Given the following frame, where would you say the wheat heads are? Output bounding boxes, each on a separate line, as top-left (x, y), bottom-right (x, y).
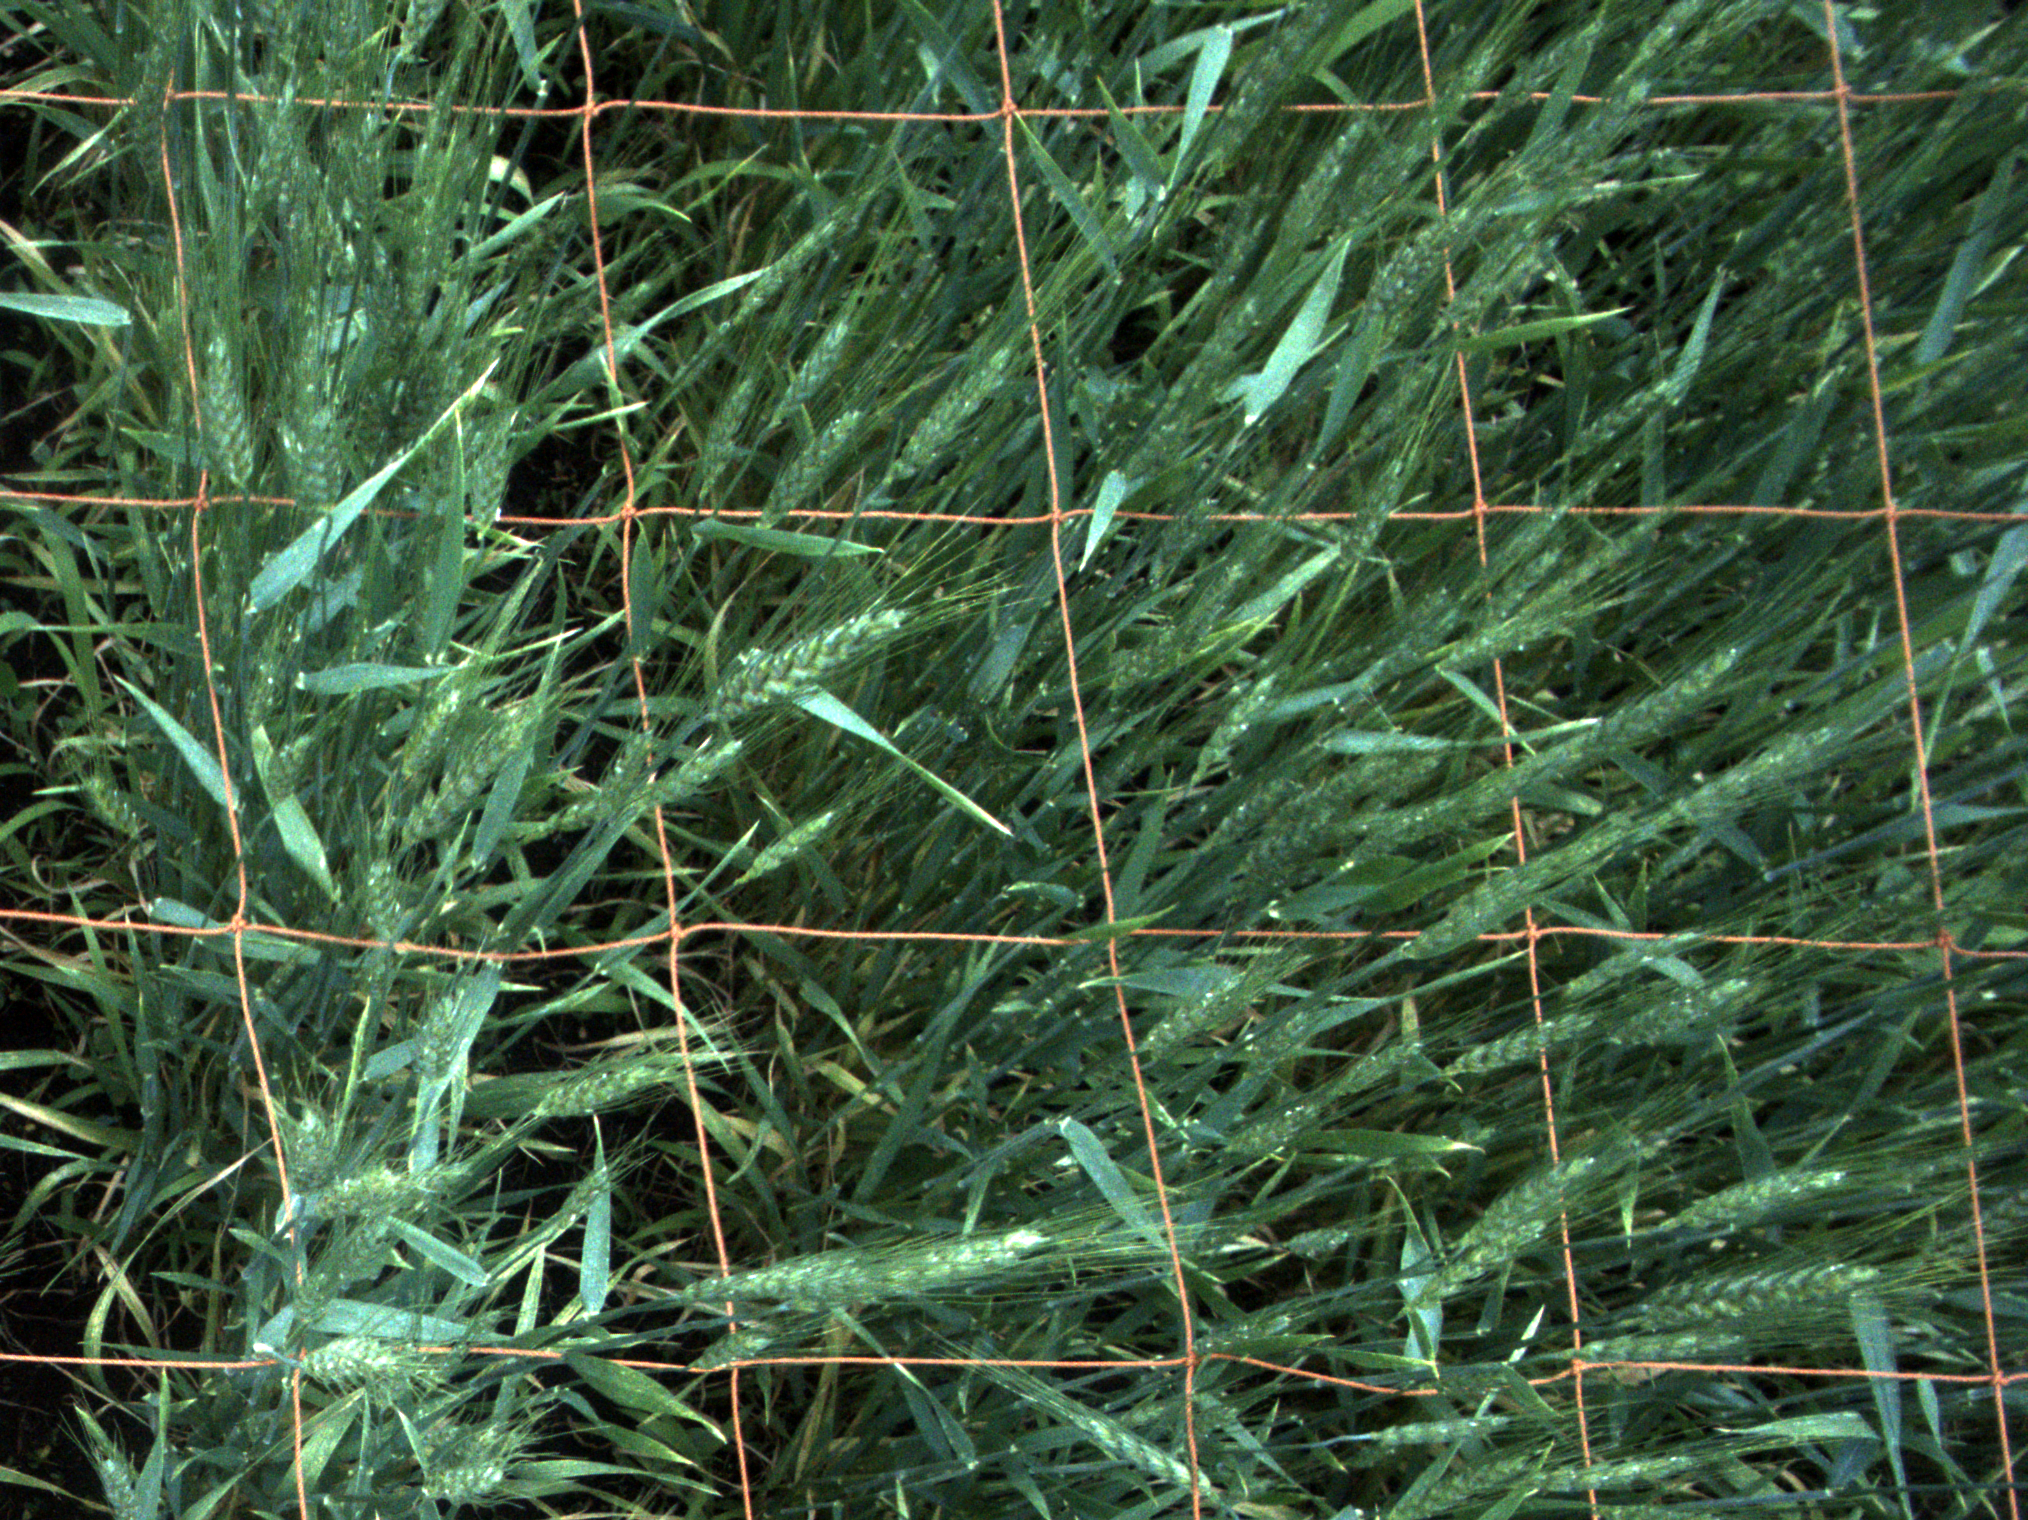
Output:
top-left (291, 1330), bottom-right (397, 1386)
top-left (203, 335), bottom-right (254, 481)
top-left (1906, 334), bottom-right (2028, 432)
top-left (1360, 363), bottom-right (1426, 438)
top-left (544, 280), bottom-right (604, 329)
top-left (1471, 236), bottom-right (1559, 316)
top-left (1429, 39), bottom-right (1495, 122)
top-left (1192, 672), bottom-right (1274, 778)
top-left (1243, 1004), bottom-right (1316, 1072)
top-left (1331, 141), bottom-right (1421, 235)
top-left (1541, 1454), bottom-right (1693, 1494)
top-left (1164, 291), bottom-right (1254, 417)
top-left (1683, 0), bottom-right (1778, 56)
top-left (769, 322), bottom-right (847, 434)
top-left (1456, 1157), bottom-right (1590, 1254)
top-left (1338, 462), bottom-right (1404, 563)
top-left (1187, 554), bottom-right (1245, 636)
top-left (601, 726), bottom-right (658, 826)
top-left (466, 407), bottom-right (510, 542)
top-left (1363, 214), bottom-right (1459, 315)
top-left (1611, 974), bottom-right (1748, 1054)
top-left (1562, 372), bottom-right (1670, 457)
top-left (1637, 0), bottom-right (1709, 53)
top-left (680, 1243), bottom-right (868, 1306)
top-left (94, 1454), bottom-right (143, 1520)
top-left (1130, 416), bottom-right (1177, 483)
top-left (264, 728), bottom-right (313, 796)
top-left (1936, 1185), bottom-right (2025, 1263)
top-left (1441, 606), bottom-right (1596, 668)
top-left (567, 1165), bottom-right (620, 1225)
top-left (262, 3), bottom-right (308, 49)
top-left (1452, 1011), bottom-right (1593, 1077)
top-left (1193, 1362), bottom-right (1233, 1390)
top-left (281, 196), bottom-right (314, 273)
top-left (882, 348), bottom-right (1010, 493)
top-left (344, 375), bottom-right (384, 454)
top-left (1079, 1419), bottom-right (1216, 1507)
top-left (1216, 1107), bottom-right (1309, 1161)
top-left (403, 0), bottom-right (452, 56)
top-left (1325, 1030), bottom-right (1424, 1099)
top-left (1222, 0), bottom-right (1340, 151)
top-left (1411, 1450), bottom-right (1528, 1518)
top-left (737, 811), bottom-right (837, 886)
top-left (1558, 72), bottom-right (1646, 171)
top-left (321, 3), bottom-right (367, 43)
top-left (293, 288), bottom-right (322, 403)
top-left (422, 995), bottom-right (457, 1079)
top-left (216, 551), bottom-right (242, 652)
top-left (1108, 635), bottom-right (1190, 692)
top-left (1583, 647), bottom-right (1738, 769)
top-left (1644, 718), bottom-right (1828, 838)
top-left (760, 410), bottom-right (864, 526)
top-left (632, 738), bottom-right (741, 816)
top-left (390, 701), bottom-right (446, 800)
top-left (1437, 238), bottom-right (1514, 334)
top-left (330, 131), bottom-right (358, 174)
top-left (245, 622), bottom-right (295, 726)
top-left (1381, 606), bottom-right (1461, 684)
top-left (1087, 732), bottom-right (1177, 800)
top-left (1594, 141), bottom-right (1676, 188)
top-left (1287, 1227), bottom-right (1353, 1258)
top-left (315, 1207), bottom-right (391, 1295)
top-left (1196, 1309), bottom-right (1292, 1357)
top-left (1132, 977), bottom-right (1223, 1055)
top-left (240, 78), bottom-right (295, 221)
top-left (1405, 1218), bottom-right (1541, 1317)
top-left (404, 710), bottom-right (528, 847)
top-left (1496, 520), bottom-right (1655, 642)
top-left (536, 1059), bottom-right (675, 1110)
top-left (366, 856), bottom-right (402, 944)
top-left (696, 373), bottom-right (751, 479)
top-left (306, 1163), bottom-right (401, 1225)
top-left (424, 1468), bottom-right (508, 1504)
top-left (88, 774), bottom-right (144, 841)
top-left (1382, 1412), bottom-right (1510, 1447)
top-left (273, 421), bottom-right (306, 485)
top-left (1269, 759), bottom-right (1382, 823)
top-left (1395, 729), bottom-right (1593, 838)
top-left (1628, 1256), bottom-right (1877, 1338)
top-left (1243, 801), bottom-right (1338, 869)
top-left (732, 216), bottom-right (838, 330)
top-left (133, 13), bottom-right (173, 194)
top-left (402, 200), bottom-right (433, 310)
top-left (1471, 539), bottom-right (1561, 622)
top-left (1581, 1336), bottom-right (1748, 1376)
top-left (325, 43), bottom-right (363, 81)
top-left (1495, 16), bottom-right (1597, 109)
top-left (693, 1330), bottom-right (770, 1368)
top-left (1118, 1399), bottom-right (1167, 1425)
top-left (1658, 1160), bottom-right (1851, 1237)
top-left (260, 948), bottom-right (300, 997)
top-left (1574, 932), bottom-right (1694, 990)
top-left (355, 114), bottom-right (391, 216)
top-left (391, 346), bottom-right (455, 445)
top-left (1199, 767), bottom-right (1291, 854)
top-left (1614, 1129), bottom-right (1663, 1164)
top-left (879, 1227), bottom-right (1051, 1293)
top-left (437, 173), bottom-right (468, 273)
top-left (1457, 495), bottom-right (1570, 600)
top-left (690, 608), bottom-right (910, 733)
top-left (515, 214), bottom-right (577, 273)
top-left (1404, 810), bottom-right (1632, 960)
top-left (465, 1419), bottom-right (496, 1467)
top-left (1281, 117), bottom-right (1362, 228)
top-left (300, 161), bottom-right (352, 290)
top-left (1607, 1510), bottom-right (1722, 1520)
top-left (610, 276), bottom-right (653, 326)
top-left (296, 1105), bottom-right (327, 1191)
top-left (302, 407), bottom-right (349, 496)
